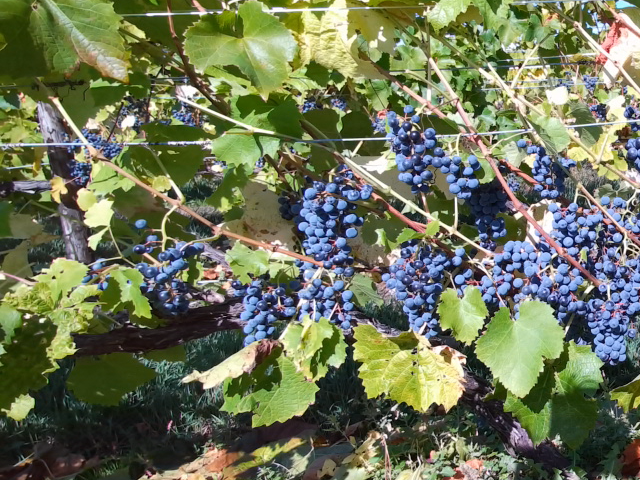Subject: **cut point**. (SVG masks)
<instances>
[{
  "label": "cut point",
  "mask_w": 640,
  "mask_h": 480,
  "mask_svg": "<svg viewBox=\"0 0 640 480\" xmlns=\"http://www.w3.org/2000/svg\"><path fill=\"white\" fill-rule=\"evenodd\" d=\"M177 208H178V207L174 205V207H171V208L168 210V212L164 214V216H163V220H162V228H161V231H164V230H165L166 218H167L168 216H170V215H171V213H172L174 210H176Z\"/></svg>",
  "instance_id": "1"
},
{
  "label": "cut point",
  "mask_w": 640,
  "mask_h": 480,
  "mask_svg": "<svg viewBox=\"0 0 640 480\" xmlns=\"http://www.w3.org/2000/svg\"><path fill=\"white\" fill-rule=\"evenodd\" d=\"M340 165H341V163L338 162V163H336V165H334L332 167V169L329 172V181H332V175H333L334 171L336 170V168H338Z\"/></svg>",
  "instance_id": "2"
}]
</instances>
